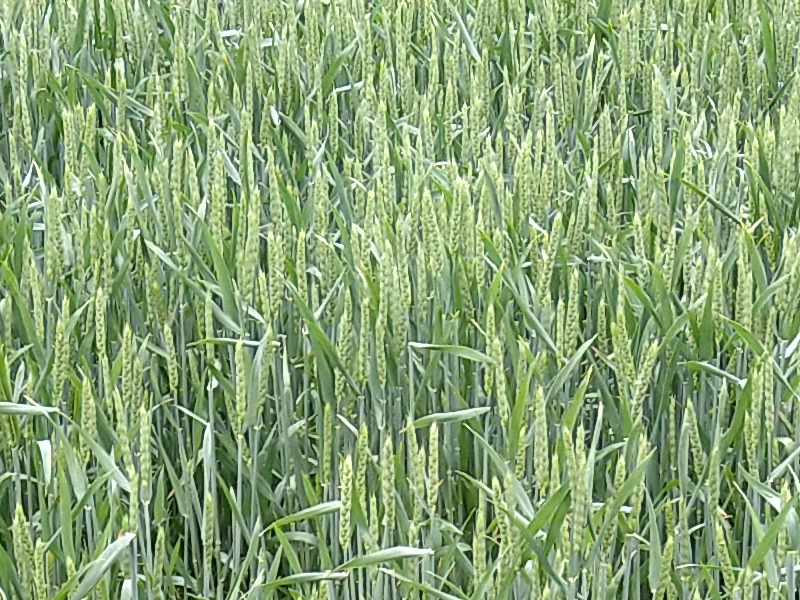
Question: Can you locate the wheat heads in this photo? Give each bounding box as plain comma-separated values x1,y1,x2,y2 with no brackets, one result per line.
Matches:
520,141,528,218
162,324,180,390
666,18,673,79
609,323,625,392
765,112,770,144
594,52,604,93
152,56,157,75
725,181,733,202
520,0,526,35
406,418,418,465
377,103,387,142
719,12,724,55
330,89,339,160
495,174,505,230
246,130,256,203
286,0,301,85
156,75,162,91
375,318,388,389
513,0,520,22
312,281,320,313
131,356,143,413
45,20,50,76
631,2,640,76
466,205,475,280
94,257,101,282
461,102,468,172
292,151,295,176
531,228,540,284
12,97,20,147
12,26,17,45
208,121,216,201
416,244,428,321
609,133,621,183
490,161,498,233
491,474,508,542
397,219,412,304
277,30,286,92
663,499,676,539
616,158,623,212
482,49,489,116
472,96,480,154
320,42,324,58
481,116,487,127
283,48,291,111
540,213,563,302
749,372,757,439
68,8,77,50
757,366,763,415
743,272,753,343
201,491,214,570
745,566,752,600
733,90,742,122
147,75,152,106
690,98,696,125
503,65,511,100
486,572,494,600
318,579,329,600
671,71,678,119
771,437,780,468
113,385,137,477
187,0,197,57
486,135,492,164
68,112,78,175
620,15,628,71
52,316,65,402
620,71,627,124
9,129,17,170
576,0,583,19
646,147,656,204
761,62,769,111
496,131,502,174
747,45,756,111
136,236,143,279
736,258,746,326
646,65,652,111
378,130,384,158
79,103,95,195
423,188,443,274
310,11,321,66
345,351,361,419
593,134,598,164
404,0,414,47
33,3,41,62
452,158,460,181
283,132,288,163
401,49,408,115
743,139,749,161
384,148,393,222
549,13,557,82
757,192,774,263
348,49,362,108
365,21,371,40
82,11,89,47
297,229,308,306
111,3,123,56
642,65,647,96
169,276,176,313
618,263,625,315
683,0,691,64
760,572,770,600
683,206,693,293
312,166,321,234
129,126,138,193
66,556,78,580
450,55,459,111
12,53,19,101
585,65,592,108
529,174,538,213
233,83,241,113
704,22,716,52
478,484,487,518
259,269,272,324
154,167,170,246
104,70,111,113
535,387,543,472
327,0,339,29
747,18,758,60
726,122,735,180
600,112,608,164
397,298,408,357
766,305,775,350
321,165,331,228
386,240,396,284
376,39,382,57
119,0,128,32
143,7,152,36
262,0,270,37
5,184,13,224
253,185,262,262
438,89,444,114
54,90,61,112
479,185,486,220
475,75,479,93
471,72,475,101
778,227,797,310
94,286,108,360
113,132,122,181
483,304,495,392
404,172,409,212
102,355,112,413
388,173,397,204
446,161,452,181
20,88,33,150
555,62,565,127
615,0,621,25
334,316,347,399
697,161,707,235
341,0,350,47
358,0,365,22
654,226,661,254
553,590,559,600
256,326,273,411
453,32,460,78
362,191,375,273
663,225,676,292
472,0,484,47
22,0,31,49
650,191,657,219
369,493,379,543
157,86,168,126
475,60,483,96
437,191,448,237
441,390,446,410
170,133,184,190
229,1,236,40
237,190,246,263
728,57,735,104
776,481,787,567
173,30,180,61
450,177,461,254
338,463,345,486
207,80,215,121
768,131,776,175
103,221,114,293
351,227,362,273
386,71,399,118
416,135,425,180
304,0,313,52
268,232,279,316
246,61,253,132
115,65,123,90
711,258,724,342
33,539,46,600
575,424,585,470
150,253,157,291
382,7,392,64
396,8,403,72
491,338,509,424
532,555,541,599
514,210,523,227
669,397,676,465
556,300,566,368
215,106,220,117
596,294,608,360
276,234,286,305
420,93,427,126
240,102,248,181
639,340,651,373
46,193,55,277
410,190,419,258
187,147,199,200
190,352,202,390
177,42,191,101
61,108,72,174
709,151,719,172
519,40,526,96
696,257,702,302
211,7,227,56
99,0,106,35
373,215,384,250
31,262,45,341
507,85,520,161
445,78,454,144
266,49,272,69
457,256,474,332
681,61,689,86
474,169,484,199
765,358,775,431
12,518,24,575
323,404,332,485
89,4,96,23
472,529,479,585
679,517,692,580
125,195,135,251
315,64,323,129
143,388,149,407
266,146,278,223
787,129,796,188
727,104,732,123
643,0,652,39
411,99,419,140
359,490,368,524
327,242,337,317
562,428,576,508
317,0,325,27
157,48,167,73
546,97,555,196
32,51,39,93
173,54,182,106
639,153,648,224
724,2,729,51
476,211,485,289
406,522,418,585
631,427,648,515
120,132,130,146
792,117,800,154
62,296,70,378
493,228,501,251
328,44,334,68
589,153,598,232
550,454,561,493
656,167,669,241
444,42,450,78
531,15,540,81
358,299,371,380
163,159,168,176
224,387,252,467
76,104,86,131
311,119,318,146
505,187,514,266
173,196,186,273
4,3,10,28
377,178,383,223
535,129,543,184
127,1,140,56
542,17,550,39
423,107,435,164
716,524,736,589
516,343,527,408
708,445,722,513
751,136,758,187
538,62,546,91
356,422,368,497
203,0,212,40
13,168,26,216
135,21,145,60
564,268,579,351
344,289,352,359
223,8,229,29
779,104,786,152
652,537,674,600
741,2,750,34
304,105,313,175
272,46,277,66
130,474,140,529
173,133,180,189
462,44,470,92
520,401,529,428
535,90,542,129
652,78,663,161
374,143,379,173
560,0,567,29
26,373,33,438
659,31,664,61
543,231,548,260
73,215,84,281
461,182,471,245
514,157,523,185
86,290,95,329
240,41,247,65
560,518,572,559
411,54,415,96
574,192,586,256
17,506,35,561
260,86,272,144
393,266,401,331
380,62,386,106
255,279,258,309
89,206,98,271
572,478,585,552
145,263,156,329
220,134,227,203
238,252,244,289
673,0,680,15
634,212,650,287
724,346,738,374
659,0,664,19
584,158,591,180
46,551,54,584
182,10,189,45
119,321,132,406
51,185,64,267
94,583,108,600
736,568,745,582
421,203,431,257
425,0,431,33
416,0,425,43
154,282,166,325
122,514,132,577
242,208,255,296
708,213,718,255
607,183,615,232
684,131,692,203
537,348,546,382
153,525,164,597
605,562,613,585
61,189,65,212
65,166,77,217
618,308,635,387
382,437,395,529
9,31,16,64
503,470,522,566
344,153,353,211
553,549,560,570
413,458,425,523
234,339,246,421
793,25,800,97
0,414,12,465
403,129,412,171
567,212,574,244
139,406,153,488
175,7,183,36
690,34,698,92
744,410,758,484
719,111,728,149
731,40,743,91
363,77,373,139
338,454,353,549
722,59,731,106
540,166,548,209
355,160,364,217
789,251,800,297
372,119,378,142
763,141,771,159
59,49,67,73
427,65,438,117
783,91,798,135
385,40,393,67
687,397,705,482
558,158,565,213
699,0,706,39
570,61,577,90
205,291,213,375
59,5,65,50
790,397,798,441
56,3,68,43
253,0,261,25
514,426,527,478
525,129,533,175
378,254,388,324
736,1,742,31
217,64,228,97
475,512,487,580
304,41,314,90
19,33,28,96
677,25,684,59
605,105,614,157
195,276,204,337
355,108,364,157
777,145,786,199
426,422,438,511
235,0,241,24
153,103,163,149
215,150,225,223
418,446,426,467
117,79,127,125
774,5,785,77
697,244,715,328
632,341,657,419
498,554,507,594
251,27,263,95
483,0,488,26
542,405,549,484
6,293,12,348
654,0,660,20
20,235,32,303
562,51,573,118
362,39,372,89
89,396,96,436
276,0,286,26
784,21,795,75
498,0,505,32
275,175,282,230
428,55,437,94
329,0,341,58
211,185,222,256
79,376,92,460
581,0,588,47
666,578,677,600
489,0,497,36
603,457,625,552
